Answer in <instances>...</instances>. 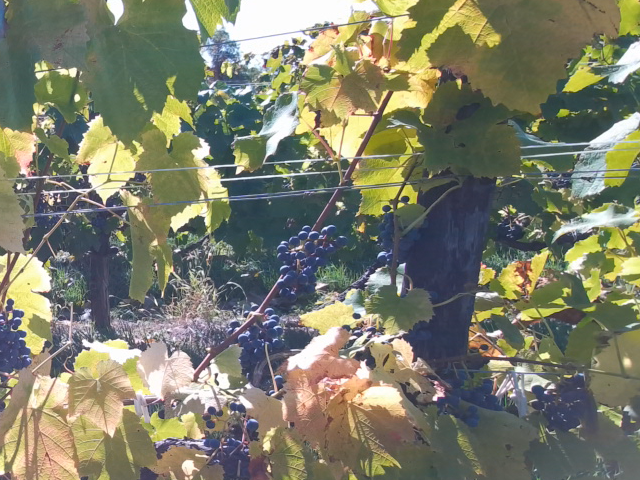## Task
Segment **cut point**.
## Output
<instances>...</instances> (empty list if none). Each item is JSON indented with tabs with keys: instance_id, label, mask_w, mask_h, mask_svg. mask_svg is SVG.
<instances>
[{
	"instance_id": "cut-point-1",
	"label": "cut point",
	"mask_w": 640,
	"mask_h": 480,
	"mask_svg": "<svg viewBox=\"0 0 640 480\" xmlns=\"http://www.w3.org/2000/svg\"><path fill=\"white\" fill-rule=\"evenodd\" d=\"M395 273H397L399 275H403L404 277H406L410 282V288H413V279L411 278V276H409L407 273L401 272L399 270H395Z\"/></svg>"
}]
</instances>
